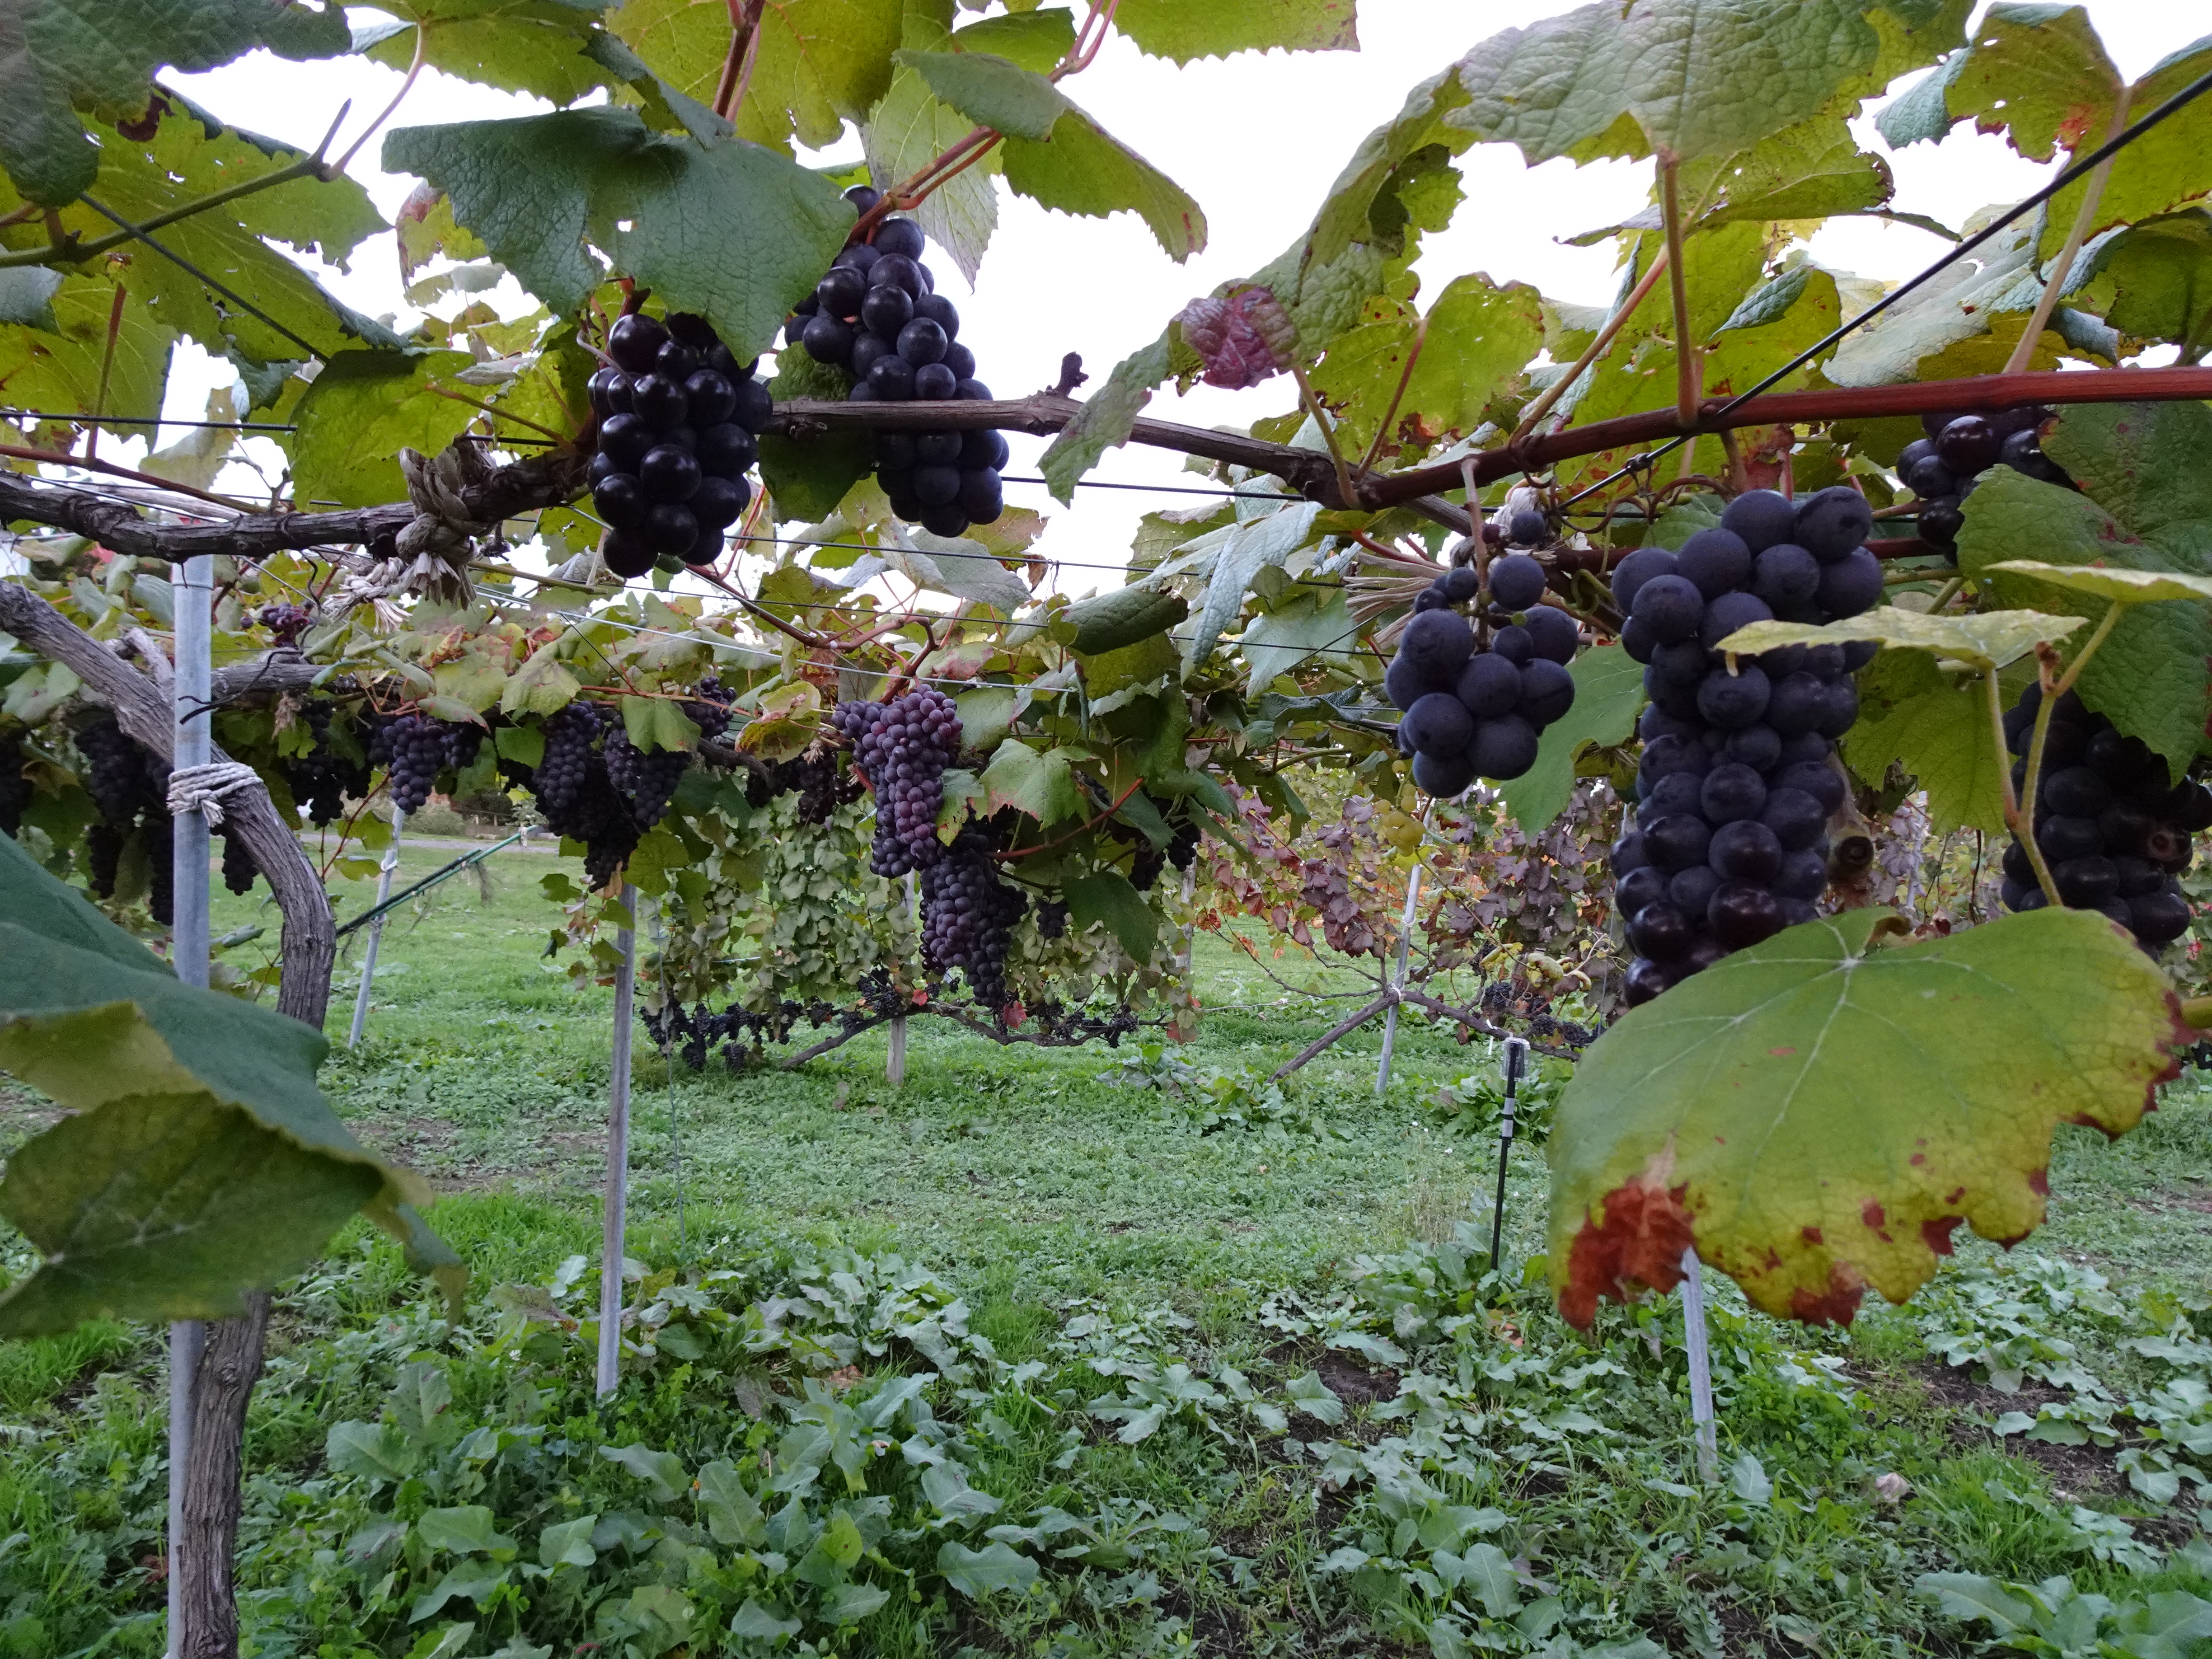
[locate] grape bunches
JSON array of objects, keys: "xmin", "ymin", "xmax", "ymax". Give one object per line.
[
  {"xmin": 867, "ymin": 976, "xmax": 914, "ymax": 1024},
  {"xmin": 1607, "ymin": 485, "xmax": 1881, "ymax": 1007},
  {"xmin": 633, "ymin": 744, "xmax": 692, "ymax": 833},
  {"xmin": 375, "ymin": 712, "xmax": 455, "ymax": 820},
  {"xmin": 867, "ymin": 794, "xmax": 914, "ymax": 882},
  {"xmin": 770, "ymin": 999, "xmax": 803, "ymax": 1046},
  {"xmin": 600, "ymin": 724, "xmax": 647, "ymax": 791},
  {"xmin": 825, "ymin": 698, "xmax": 867, "ymax": 804},
  {"xmin": 628, "ymin": 672, "xmax": 736, "ymax": 830},
  {"xmin": 1163, "ymin": 806, "xmax": 1203, "ymax": 875},
  {"xmin": 531, "ymin": 700, "xmax": 602, "ymax": 841},
  {"xmin": 680, "ymin": 1007, "xmax": 714, "ymax": 1077},
  {"xmin": 587, "ymin": 310, "xmax": 775, "ymax": 578},
  {"xmin": 790, "ymin": 751, "xmax": 860, "ymax": 827},
  {"xmin": 783, "ymin": 183, "xmax": 1008, "ymax": 537},
  {"xmin": 805, "ymin": 996, "xmax": 839, "ymax": 1031},
  {"xmin": 1369, "ymin": 760, "xmax": 1426, "ymax": 856},
  {"xmin": 958, "ymin": 977, "xmax": 1013, "ymax": 1018},
  {"xmin": 917, "ymin": 816, "xmax": 998, "ymax": 975},
  {"xmin": 1896, "ymin": 397, "xmax": 2065, "ymax": 569},
  {"xmin": 1385, "ymin": 508, "xmax": 1578, "ymax": 795},
  {"xmin": 678, "ymin": 672, "xmax": 739, "ymax": 746},
  {"xmin": 426, "ymin": 712, "xmax": 486, "ymax": 772},
  {"xmin": 1077, "ymin": 765, "xmax": 1200, "ymax": 891},
  {"xmin": 280, "ymin": 691, "xmax": 367, "ymax": 828},
  {"xmin": 1034, "ymin": 891, "xmax": 1075, "ymax": 943},
  {"xmin": 1997, "ymin": 673, "xmax": 2212, "ymax": 949},
  {"xmin": 867, "ymin": 690, "xmax": 963, "ymax": 875},
  {"xmin": 1125, "ymin": 837, "xmax": 1165, "ymax": 891},
  {"xmin": 961, "ymin": 882, "xmax": 1029, "ymax": 974}
]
